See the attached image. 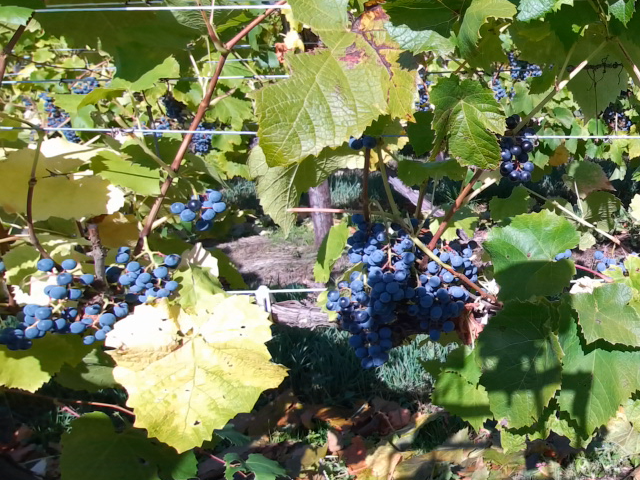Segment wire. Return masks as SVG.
<instances>
[{
    "label": "wire",
    "mask_w": 640,
    "mask_h": 480,
    "mask_svg": "<svg viewBox=\"0 0 640 480\" xmlns=\"http://www.w3.org/2000/svg\"><path fill=\"white\" fill-rule=\"evenodd\" d=\"M296 9L294 4L290 5H266V4H191V5H151V6H54L40 8L36 6L34 11L38 15H50L56 13H153V12H193V11H264V12H292Z\"/></svg>",
    "instance_id": "wire-1"
},
{
    "label": "wire",
    "mask_w": 640,
    "mask_h": 480,
    "mask_svg": "<svg viewBox=\"0 0 640 480\" xmlns=\"http://www.w3.org/2000/svg\"><path fill=\"white\" fill-rule=\"evenodd\" d=\"M46 132L51 133H87L98 135H115V134H128L135 136L142 135H173L180 137H193V138H213V137H234V136H251L256 137L258 132L254 129H231V130H211V131H195V130H182L175 128H130V127H113V128H100L89 126H53L46 125L44 127Z\"/></svg>",
    "instance_id": "wire-2"
},
{
    "label": "wire",
    "mask_w": 640,
    "mask_h": 480,
    "mask_svg": "<svg viewBox=\"0 0 640 480\" xmlns=\"http://www.w3.org/2000/svg\"><path fill=\"white\" fill-rule=\"evenodd\" d=\"M325 286L319 287H264V288H246L242 290L227 289L225 294L230 297H244L248 295H266V294H321L325 293Z\"/></svg>",
    "instance_id": "wire-3"
}]
</instances>
